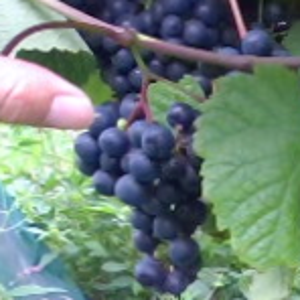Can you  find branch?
<instances>
[{
	"label": "branch",
	"mask_w": 300,
	"mask_h": 300,
	"mask_svg": "<svg viewBox=\"0 0 300 300\" xmlns=\"http://www.w3.org/2000/svg\"><path fill=\"white\" fill-rule=\"evenodd\" d=\"M39 2L52 8L57 13L66 15L72 21L39 22L38 24L31 25L28 29L23 30L8 41L4 49L0 51L2 56L7 57L12 52L14 46L26 37L31 36L34 32L42 29L74 28L82 23L87 25H96L107 29V31L123 45H132L134 41H136L137 43L156 47L162 50L194 56L212 62H218L223 65H232L233 67L245 70L251 69L253 67V62L262 61L278 62L283 67L289 69H297L300 66L299 55H247L216 52L205 48L165 41L154 36L145 35L132 26H125L101 20L89 15L88 13L81 12L79 9H76L75 7L60 0H39Z\"/></svg>",
	"instance_id": "1"
}]
</instances>
